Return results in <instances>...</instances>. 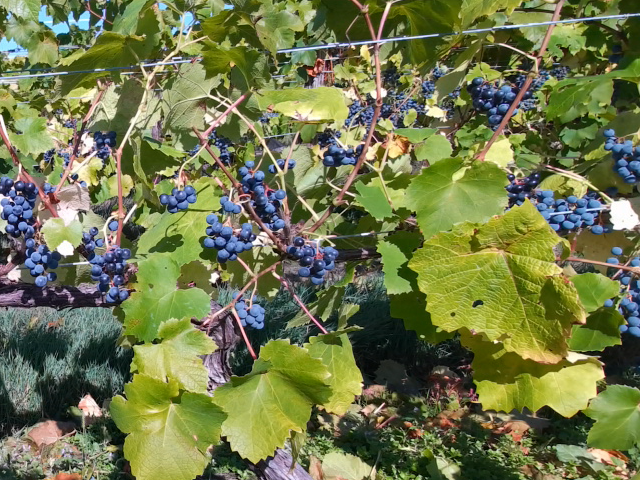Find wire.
Masks as SVG:
<instances>
[{
	"mask_svg": "<svg viewBox=\"0 0 640 480\" xmlns=\"http://www.w3.org/2000/svg\"><path fill=\"white\" fill-rule=\"evenodd\" d=\"M194 58H175V59H161L154 62H143V67H157L163 64H178V63H194Z\"/></svg>",
	"mask_w": 640,
	"mask_h": 480,
	"instance_id": "a009ed1b",
	"label": "wire"
},
{
	"mask_svg": "<svg viewBox=\"0 0 640 480\" xmlns=\"http://www.w3.org/2000/svg\"><path fill=\"white\" fill-rule=\"evenodd\" d=\"M396 230H377L367 232H355V233H341V234H326V239H344V238H357V237H369L379 235H396Z\"/></svg>",
	"mask_w": 640,
	"mask_h": 480,
	"instance_id": "f0478fcc",
	"label": "wire"
},
{
	"mask_svg": "<svg viewBox=\"0 0 640 480\" xmlns=\"http://www.w3.org/2000/svg\"><path fill=\"white\" fill-rule=\"evenodd\" d=\"M448 35H449L448 31H436L433 33L410 34V35H405L400 37H388V38H380V39H373V40H368V39L348 40L343 42H336V43L331 42V43L317 44L312 46H291V47L279 49L278 53L285 54L293 51L310 52V51H315L319 49H334V48L346 47L350 45H375V44L390 43V42H403V41H408L413 39L435 38L439 36H448Z\"/></svg>",
	"mask_w": 640,
	"mask_h": 480,
	"instance_id": "a73af890",
	"label": "wire"
},
{
	"mask_svg": "<svg viewBox=\"0 0 640 480\" xmlns=\"http://www.w3.org/2000/svg\"><path fill=\"white\" fill-rule=\"evenodd\" d=\"M639 15H640V10H636L633 12H625V13H606L603 15H596L594 17H579L574 19L550 20V21H542V22L510 23V24L500 25L496 27L479 28L476 30L463 29L462 33L464 35H479L482 33H492V32L512 29V28H531V27H544V26H552V25L576 24L581 22H596L598 20H605L608 18H627V17H635Z\"/></svg>",
	"mask_w": 640,
	"mask_h": 480,
	"instance_id": "d2f4af69",
	"label": "wire"
},
{
	"mask_svg": "<svg viewBox=\"0 0 640 480\" xmlns=\"http://www.w3.org/2000/svg\"><path fill=\"white\" fill-rule=\"evenodd\" d=\"M138 64H127L120 66H107V67H96V68H88L82 70H54L50 72L44 73H29L25 75H0V80H27L32 78H46L52 77L56 75H84L90 73H99V72H114V71H122L129 69H138Z\"/></svg>",
	"mask_w": 640,
	"mask_h": 480,
	"instance_id": "4f2155b8",
	"label": "wire"
}]
</instances>
